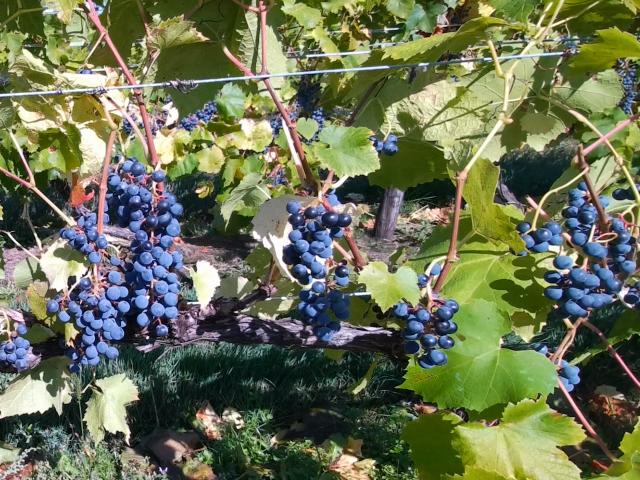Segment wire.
<instances>
[{
  "instance_id": "obj_1",
  "label": "wire",
  "mask_w": 640,
  "mask_h": 480,
  "mask_svg": "<svg viewBox=\"0 0 640 480\" xmlns=\"http://www.w3.org/2000/svg\"><path fill=\"white\" fill-rule=\"evenodd\" d=\"M566 55L565 51L561 52H543L533 55L523 56H495V55H476L470 57H463L453 60H434L426 63H385L382 65H368L353 68H336V69H321V70H307L295 73H273V74H253L247 76H234L230 78H192L183 79L179 81L168 82H156V83H130L121 84L116 86H97L87 88H70L58 91H23L19 93H0V98H22L26 96H61L72 93H89L99 91H118L123 89L133 88H159L170 86H181L185 84H212V83H233L236 81H249L255 79H275V78H297L309 75H324V74H339V73H355L370 70H384L388 68H428L436 65H455L465 62H472L478 60H497V61H525L535 60L546 57H563Z\"/></svg>"
},
{
  "instance_id": "obj_2",
  "label": "wire",
  "mask_w": 640,
  "mask_h": 480,
  "mask_svg": "<svg viewBox=\"0 0 640 480\" xmlns=\"http://www.w3.org/2000/svg\"><path fill=\"white\" fill-rule=\"evenodd\" d=\"M299 295L298 294H290V295H285V296H281V297H276V296H267L266 300L269 302H283V301H288V300H292V299H298Z\"/></svg>"
}]
</instances>
